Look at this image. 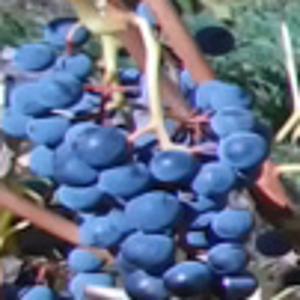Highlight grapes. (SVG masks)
<instances>
[{
    "label": "grapes",
    "instance_id": "2",
    "mask_svg": "<svg viewBox=\"0 0 300 300\" xmlns=\"http://www.w3.org/2000/svg\"><path fill=\"white\" fill-rule=\"evenodd\" d=\"M9 300H58L56 293L46 286H25L15 288Z\"/></svg>",
    "mask_w": 300,
    "mask_h": 300
},
{
    "label": "grapes",
    "instance_id": "1",
    "mask_svg": "<svg viewBox=\"0 0 300 300\" xmlns=\"http://www.w3.org/2000/svg\"><path fill=\"white\" fill-rule=\"evenodd\" d=\"M83 24L64 16L42 42L17 47L19 80L3 89L0 130L30 141L34 175L59 186L57 204L81 218L82 245L116 247L120 276L105 260L75 248L66 256L73 300L189 299L213 289L219 300H246V235L253 213L225 208L235 186L253 185L270 156L257 131L252 87L233 79L197 83L189 70L180 92L198 119L184 128L168 115L156 127L144 75L95 70Z\"/></svg>",
    "mask_w": 300,
    "mask_h": 300
}]
</instances>
